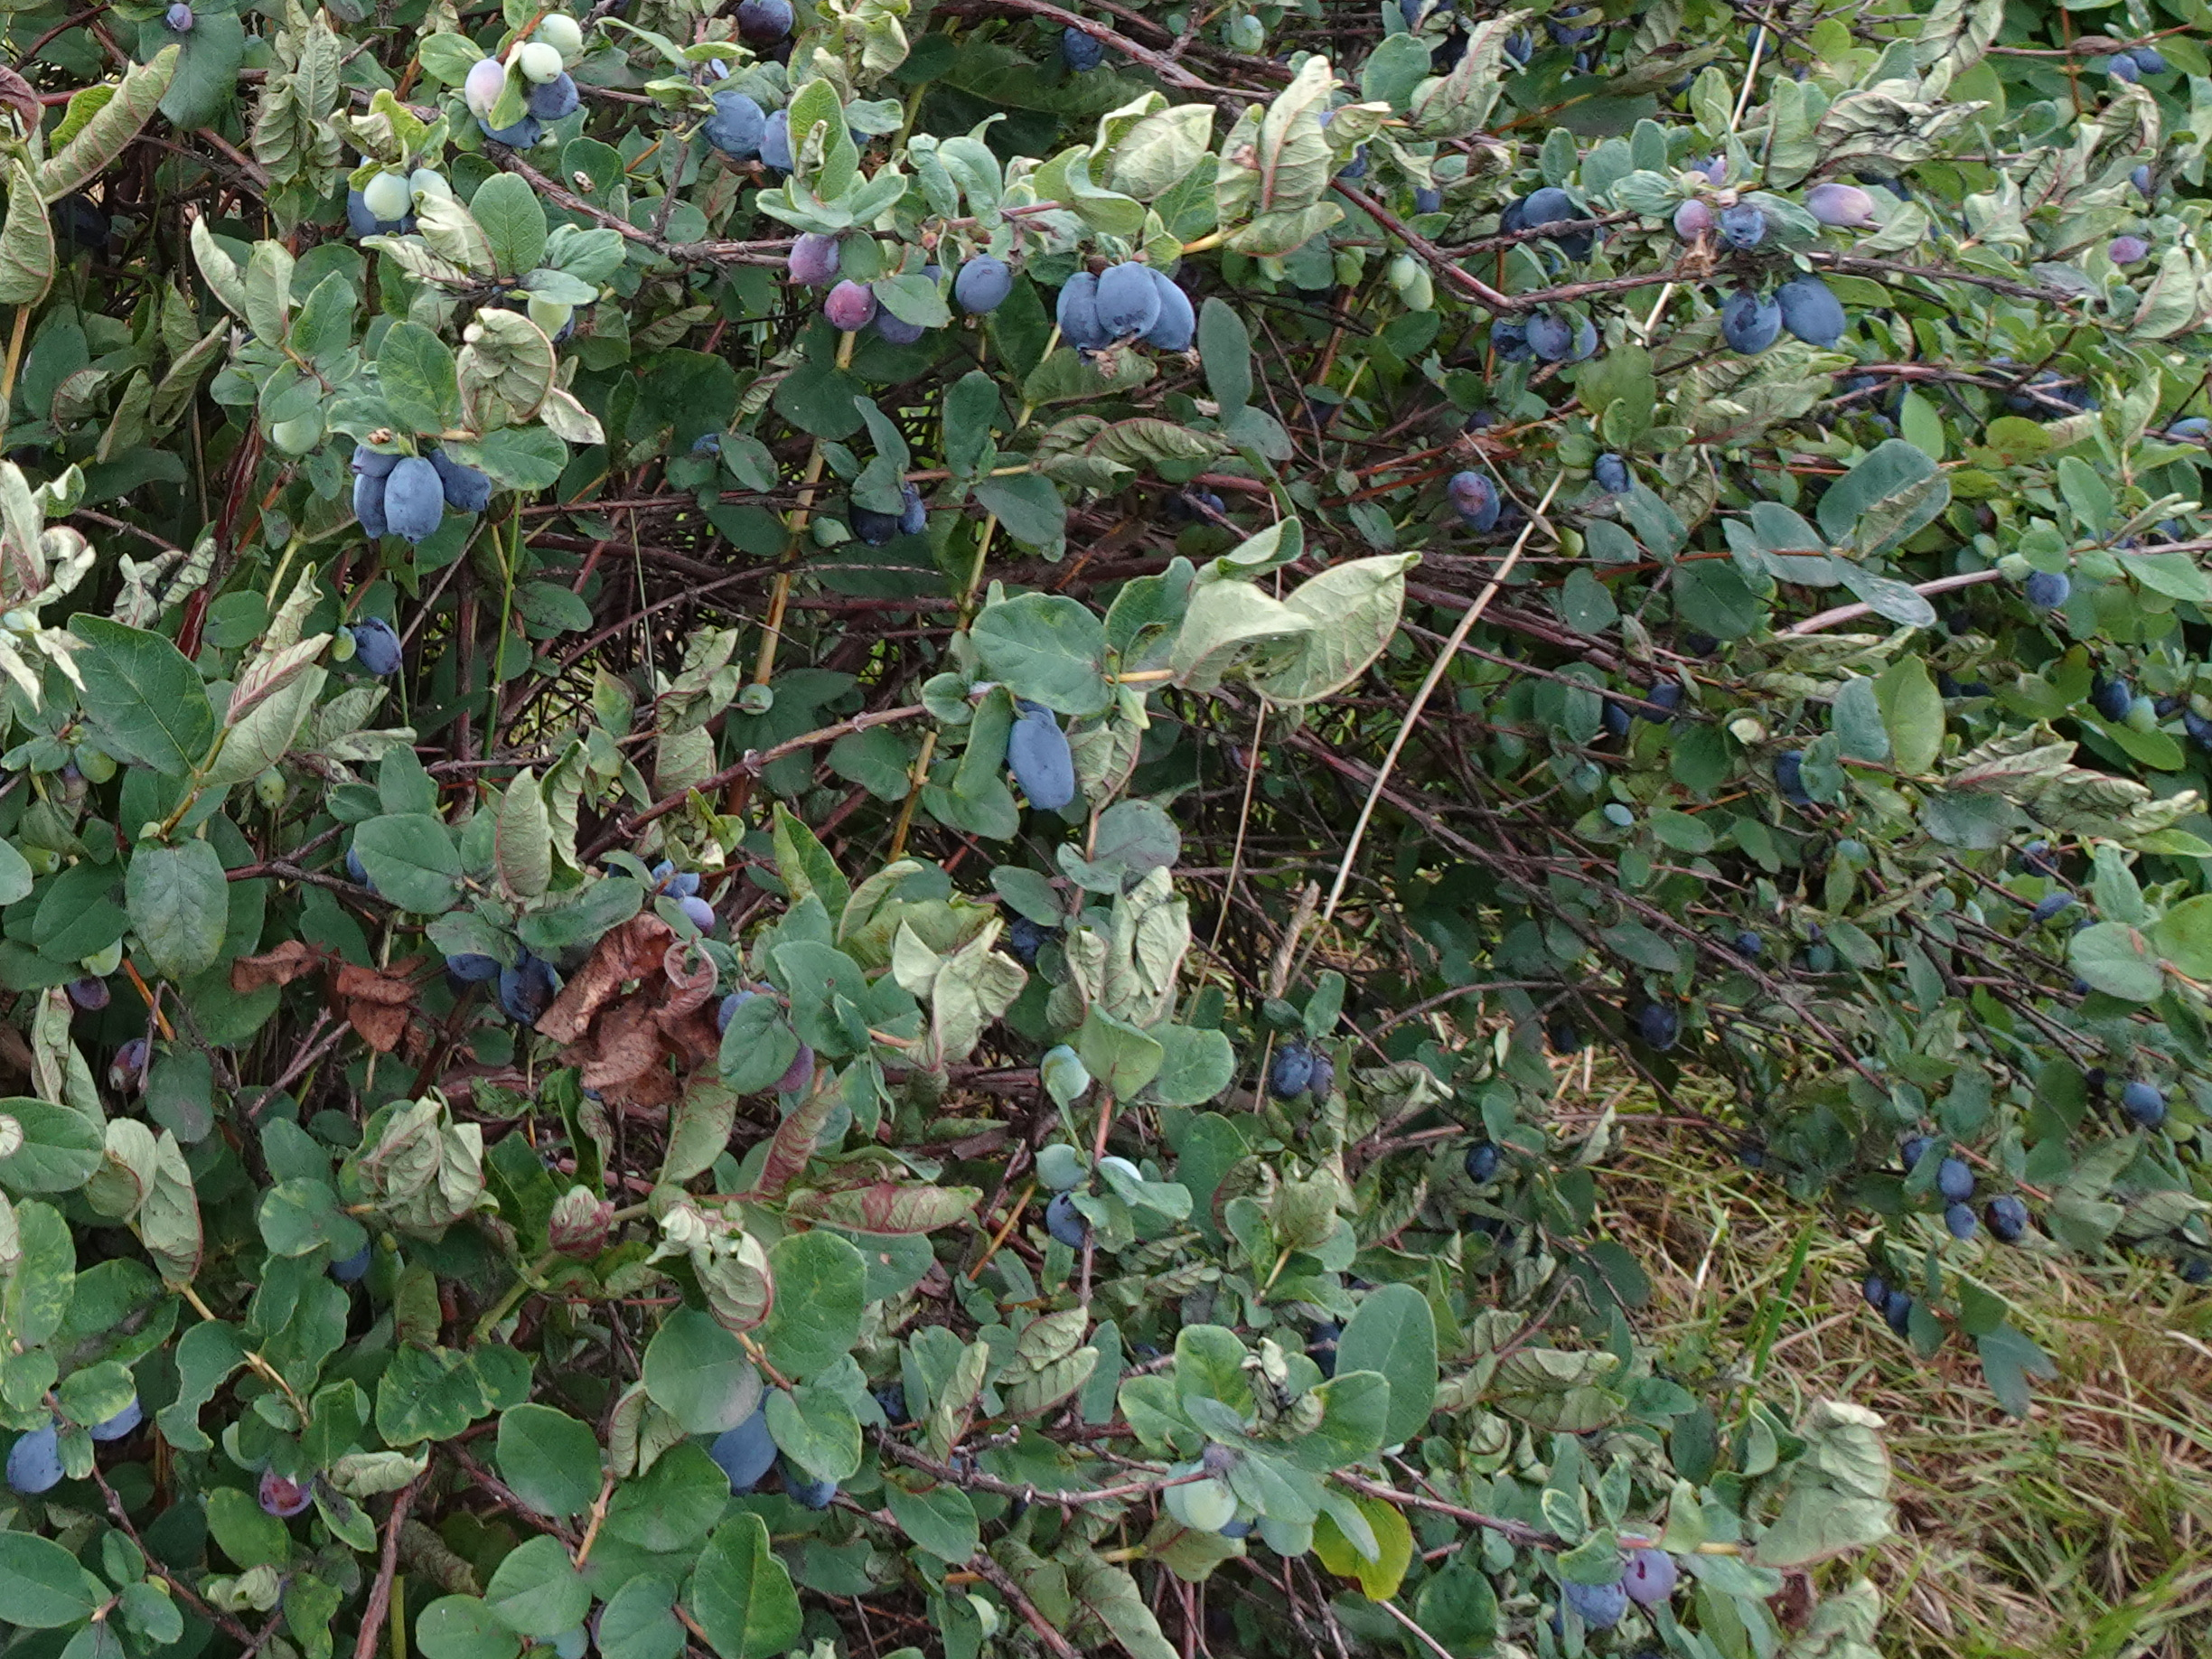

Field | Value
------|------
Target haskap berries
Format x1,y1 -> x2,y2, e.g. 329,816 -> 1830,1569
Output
525,66 -> 580,120
812,516 -> 851,546
476,112 -> 543,148
1886,179 -> 1911,200
1333,141 -> 1368,179
2091,671 -> 2131,723
1551,1022 -> 1578,1055
1994,552 -> 2032,580
895,488 -> 928,534
1665,72 -> 1691,96
1306,1055 -> 1335,1106
1469,303 -> 1490,324
107,1035 -> 158,1090
443,951 -> 500,981
1426,698 -> 1444,711
1007,711 -> 1074,809
956,253 -> 1014,314
528,296 -> 571,339
1306,1323 -> 1344,1378
1581,23 -> 1597,40
1219,1515 -> 1258,1536
2025,571 -> 2070,609
1816,412 -> 1834,428
167,3 -> 193,31
1641,683 -> 1683,723
674,897 -> 716,938
1498,501 -> 1520,531
1740,1129 -> 1767,1169
1694,155 -> 1714,174
876,1381 -> 910,1428
1097,256 -> 1160,342
1164,1460 -> 1192,1529
1275,53 -> 1290,64
1192,492 -> 1226,529
700,90 -> 766,160
607,863 -> 635,880
1054,264 -> 1112,352
1802,184 -> 1873,225
1960,682 -> 1990,697
2122,1081 -> 2163,1128
2030,890 -> 2072,924
789,230 -> 842,286
759,1389 -> 778,1410
9,1423 -> 65,1494
1221,14 -> 1263,55
1503,642 -> 1520,657
2123,695 -> 2157,733
352,443 -> 400,478
849,127 -> 870,145
534,14 -> 582,59
733,1482 -> 756,1496
365,171 -> 411,222
585,0 -> 630,16
1399,264 -> 1433,312
500,945 -> 558,1026
2192,693 -> 2210,719
1620,1547 -> 1676,1609
67,976 -> 108,1009
272,402 -> 326,455
1333,254 -> 1362,288
653,857 -> 701,900
919,265 -> 942,287
1128,261 -> 1195,350
2084,1067 -> 2108,1098
345,845 -> 367,885
2126,537 -> 2135,549
1794,65 -> 1809,79
1716,0 -> 1749,12
1776,275 -> 1846,348
531,1622 -> 590,1659
1046,1190 -> 1090,1247
1708,159 -> 1726,186
1943,1200 -> 1976,1240
1935,1156 -> 1976,1201
1303,398 -> 1333,427
2172,1255 -> 2210,1284
1544,252 -> 1562,275
2069,386 -> 2100,416
2072,974 -> 2091,997
1039,1043 -> 1091,1100
1499,196 -> 1535,235
2025,407 -> 2047,422
1721,289 -> 1782,353
1018,700 -> 1057,726
352,619 -> 402,675
255,770 -> 286,809
1063,21 -> 1106,72
1985,1191 -> 2026,1243
2038,370 -> 2070,420
585,1089 -> 602,1099
826,280 -> 877,331
1168,14 -> 1187,35
1674,199 -> 1712,240
1893,389 -> 1905,422
349,155 -> 418,237
773,1045 -> 813,1092
1596,454 -> 1629,493
692,432 -> 722,459
591,1606 -> 604,1644
1993,356 -> 2012,364
2006,394 -> 2035,412
1734,928 -> 1763,961
1035,1145 -> 1089,1190
2148,520 -> 2181,548
1561,463 -> 1590,480
259,1460 -> 316,1513
2163,419 -> 2210,445
877,302 -> 925,346
2131,49 -> 2168,75
1808,944 -> 1834,975
88,1392 -> 142,1443
1521,186 -> 1576,228
1835,839 -> 1872,872
386,456 -> 443,543
353,473 -> 390,538
1644,1002 -> 1677,1047
465,59 -> 505,116
1463,1141 -> 1497,1187
1901,1138 -> 1934,1174
1975,503 -> 1996,531
711,1409 -> 777,1489
1490,318 -> 1536,364
740,683 -> 773,716
1853,171 -> 1887,185
1916,354 -> 1933,388
1548,8 -> 1584,46
1886,1290 -> 1911,1336
1872,374 -> 1891,400
1604,703 -> 1632,737
1465,411 -> 1494,435
1928,222 -> 1949,242
75,743 -> 117,783
718,990 -> 755,1033
1564,315 -> 1598,360
1499,24 -> 1531,67
1973,534 -> 2000,559
2184,708 -> 2208,738
1444,33 -> 1469,71
1268,1045 -> 1313,1102
1745,25 -> 1772,58
1948,610 -> 1971,637
1232,744 -> 1249,770
331,625 -> 356,662
1715,234 -> 1731,253
1008,916 -> 1051,960
1259,254 -> 1285,282
2018,842 -> 2060,879
1526,312 -> 1571,360
1721,201 -> 1768,248
1099,1155 -> 1142,1185
1693,60 -> 1714,75
2087,530 -> 2127,550
1430,49 -> 1444,68
1343,243 -> 1364,267
1385,253 -> 1417,292
774,1453 -> 838,1511
1320,111 -> 1335,128
736,0 -> 792,44
1559,526 -> 1583,558
1871,415 -> 1894,434
410,168 -> 452,202
2157,696 -> 2176,714
1415,187 -> 1440,214
1864,1271 -> 1889,1310
64,763 -> 89,800
1545,1604 -> 1564,1636
1396,0 -> 1422,28
1448,471 -> 1500,532
758,108 -> 795,171
1775,750 -> 1811,807
847,493 -> 896,544
2072,915 -> 2093,939
519,42 -> 563,84
432,446 -> 492,513
1568,50 -> 1588,77
960,1594 -> 997,1639
221,1420 -> 270,1474
327,1243 -> 371,1288
553,310 -> 575,343
2106,53 -> 2139,86
1938,671 -> 1963,699
58,194 -> 109,247
1685,630 -> 1718,655
1846,375 -> 1875,400
1185,1457 -> 1238,1531
1419,0 -> 1455,12
2108,235 -> 2149,263
2130,164 -> 2150,196
1554,220 -> 1604,262
138,822 -> 160,839
1564,1579 -> 1624,1626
